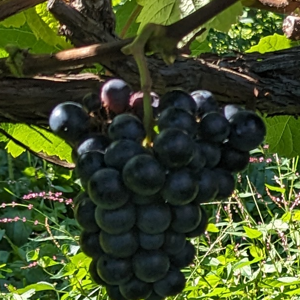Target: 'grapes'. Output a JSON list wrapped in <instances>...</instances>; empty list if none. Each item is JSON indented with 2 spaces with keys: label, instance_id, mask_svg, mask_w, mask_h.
Here are the masks:
<instances>
[{
  "label": "grapes",
  "instance_id": "01657485",
  "mask_svg": "<svg viewBox=\"0 0 300 300\" xmlns=\"http://www.w3.org/2000/svg\"><path fill=\"white\" fill-rule=\"evenodd\" d=\"M131 97L125 80L110 79L81 103H59L49 125L74 148L87 190L73 210L92 278L112 300H163L185 287L181 269L195 250L184 238L207 227L202 205L234 193L233 173L248 166L266 126L242 106L221 108L210 91L174 89L161 101L159 131L146 149L144 124L125 108Z\"/></svg>",
  "mask_w": 300,
  "mask_h": 300
}]
</instances>
